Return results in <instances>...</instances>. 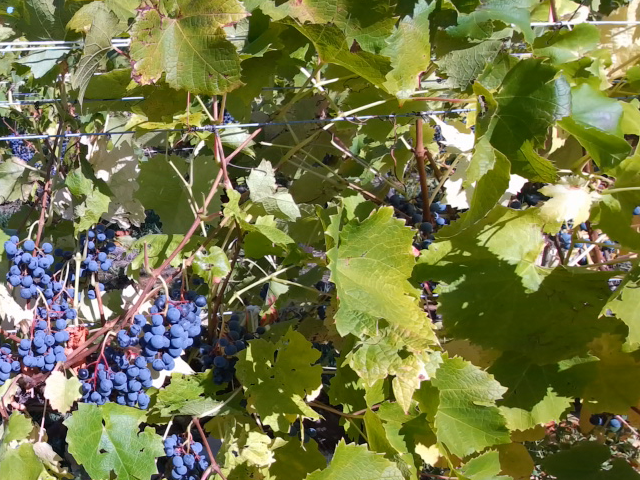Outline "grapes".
<instances>
[{"label":"grapes","mask_w":640,"mask_h":480,"mask_svg":"<svg viewBox=\"0 0 640 480\" xmlns=\"http://www.w3.org/2000/svg\"><path fill=\"white\" fill-rule=\"evenodd\" d=\"M166 295L161 294L155 300V305L150 307L151 324H147L146 316L142 313L134 315V322L130 325V331L122 329L116 338L121 347L142 348V355L130 365L128 358L121 350L105 347L103 355L115 363L125 373L114 370L102 362L97 363L98 390H94L93 383H87L89 371L79 369V381L83 383L82 394L86 403L96 402L103 404L109 402L112 389L119 391L116 403L119 405L134 406L139 401V408L146 410L150 405V397L143 390L144 387L153 386L152 372L147 364H152L155 371H172L175 361L183 351L194 345V337L202 332L199 314L202 307L207 304V297L198 294L196 290H190L184 294L188 304H170L165 310V315L158 314L165 309Z\"/></svg>","instance_id":"1"},{"label":"grapes","mask_w":640,"mask_h":480,"mask_svg":"<svg viewBox=\"0 0 640 480\" xmlns=\"http://www.w3.org/2000/svg\"><path fill=\"white\" fill-rule=\"evenodd\" d=\"M18 244L19 237L17 235H11L9 241L4 243L6 258L13 260L16 264L12 265L10 271L6 273V280L14 287H23L19 291V296L23 299H30L32 296L44 292V297L47 298L46 304L50 309L49 317L57 319L55 325L58 330H64L67 327V322L62 317L65 316L67 319L73 320L77 317V310L70 308L65 293L52 300L54 292L60 293L65 284V281H51V276L45 274V270H49L55 264V258L49 254L33 257L30 253H24L21 248H17ZM23 264H27L35 277H39L38 282H34V278L30 274L21 275L20 266Z\"/></svg>","instance_id":"2"},{"label":"grapes","mask_w":640,"mask_h":480,"mask_svg":"<svg viewBox=\"0 0 640 480\" xmlns=\"http://www.w3.org/2000/svg\"><path fill=\"white\" fill-rule=\"evenodd\" d=\"M37 314L42 320L35 323V331L33 332V341L31 339H22L17 353L23 357L22 362L26 367L41 368L44 371H52L55 368V362H65V349L61 344L69 340L67 331H59L49 333L44 331L47 323V309L44 306L36 308Z\"/></svg>","instance_id":"3"},{"label":"grapes","mask_w":640,"mask_h":480,"mask_svg":"<svg viewBox=\"0 0 640 480\" xmlns=\"http://www.w3.org/2000/svg\"><path fill=\"white\" fill-rule=\"evenodd\" d=\"M185 444V439L181 435L174 434L172 437L166 436L164 440L165 455L173 458L171 474L175 480H199L197 475L189 477V471L194 470L196 457L191 454H182L176 448H181Z\"/></svg>","instance_id":"4"},{"label":"grapes","mask_w":640,"mask_h":480,"mask_svg":"<svg viewBox=\"0 0 640 480\" xmlns=\"http://www.w3.org/2000/svg\"><path fill=\"white\" fill-rule=\"evenodd\" d=\"M0 351V385H3L12 375L13 372L16 374H20L22 372V364L19 360L12 361L10 358H7L3 352L10 354L12 352V347L9 342L3 343L1 345Z\"/></svg>","instance_id":"5"},{"label":"grapes","mask_w":640,"mask_h":480,"mask_svg":"<svg viewBox=\"0 0 640 480\" xmlns=\"http://www.w3.org/2000/svg\"><path fill=\"white\" fill-rule=\"evenodd\" d=\"M114 236H115V231L113 229L105 230V227L103 225H98L96 227V231L89 230L87 232V237L89 239L96 238L99 241H104L105 239L112 240Z\"/></svg>","instance_id":"6"},{"label":"grapes","mask_w":640,"mask_h":480,"mask_svg":"<svg viewBox=\"0 0 640 480\" xmlns=\"http://www.w3.org/2000/svg\"><path fill=\"white\" fill-rule=\"evenodd\" d=\"M93 259H94V254L88 253L87 258L83 260V263L85 264V268L84 267L80 268V274H79L80 277L83 276V271L96 272L99 270V263Z\"/></svg>","instance_id":"7"},{"label":"grapes","mask_w":640,"mask_h":480,"mask_svg":"<svg viewBox=\"0 0 640 480\" xmlns=\"http://www.w3.org/2000/svg\"><path fill=\"white\" fill-rule=\"evenodd\" d=\"M200 458H201V461L198 462V465L200 466V469L208 471L209 468H210V463L206 459V455L205 454H201Z\"/></svg>","instance_id":"8"}]
</instances>
